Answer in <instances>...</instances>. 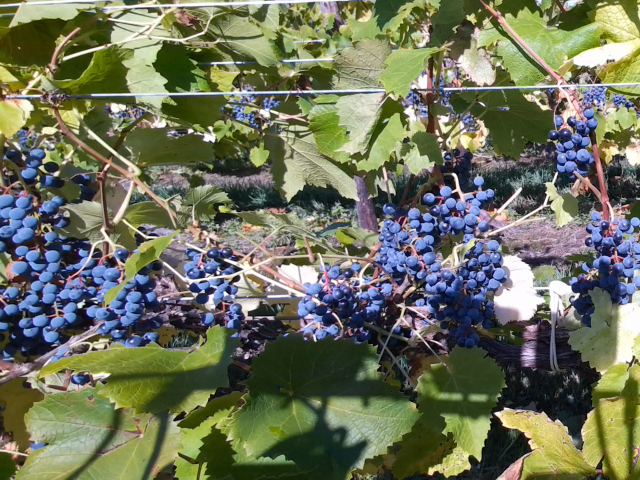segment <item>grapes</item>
<instances>
[{
  "label": "grapes",
  "instance_id": "01657485",
  "mask_svg": "<svg viewBox=\"0 0 640 480\" xmlns=\"http://www.w3.org/2000/svg\"><path fill=\"white\" fill-rule=\"evenodd\" d=\"M34 207V197L26 194L18 197L11 194L0 195V253L5 250L16 257H24L25 261H14L11 271L14 274H23L30 270L31 277L37 276L38 280L29 284V290L25 291L23 300L18 305L10 304L0 309V330L8 331L12 322L10 317L19 315V312H30L34 316H24L18 321L17 329L10 335V342L0 351V360L12 363L10 358L16 354L17 343L24 337L35 338L41 329L42 341L53 343L55 346L67 342L65 333H58L55 329L65 328L68 324L74 325L78 320V305L75 303L84 298L95 296L97 303H104V295L112 287L118 285L120 270L112 267L108 261L97 264L95 259L89 262L90 244L78 237L67 235L57 236L56 231L44 234V240L51 242L46 246L44 259H40L39 249L30 250L27 244L34 238V230L38 226V220L34 216H25ZM88 262L79 276L64 282L62 285L44 283L50 282L57 276L67 279ZM86 277H92V282L100 285V290L94 286H88ZM56 301L58 308H63L64 316L50 318L47 314H37L43 311L45 304L53 305Z\"/></svg>",
  "mask_w": 640,
  "mask_h": 480
},
{
  "label": "grapes",
  "instance_id": "b958b902",
  "mask_svg": "<svg viewBox=\"0 0 640 480\" xmlns=\"http://www.w3.org/2000/svg\"><path fill=\"white\" fill-rule=\"evenodd\" d=\"M440 194L447 198L445 203L438 205L436 195L433 192H426L423 195V201L429 206V211H425L422 215L418 207H410L407 210V217L410 220V227L413 229L409 234L406 230H401V225L392 219H386L381 227V232L377 235L382 245L377 247V253L380 256L375 258L377 265H381V269L387 274L405 273L417 276L419 280L424 278L426 282L424 290L428 294L425 300L417 299L415 305L417 307L427 306V310L431 314H436L439 310V303L444 301V292L449 297H457L464 284L468 289L475 290L478 286V293L465 295L460 302L462 307L480 308L482 303L487 299V293L496 290L507 280V275L502 267H495L503 263V255L498 252L499 242L490 240L487 243V249L494 251L489 255L483 252L485 243L477 240L472 247V258L460 268L458 272H452L450 269H441V263L437 261V254L432 244L435 237L431 234L438 225L440 216L442 221L439 223L438 235L445 237L447 233L450 235H459L462 231V241L468 243L473 237V226L477 224L480 232H485L489 227L487 220L478 223V215L480 213L481 202L495 197L493 189L478 190L475 195L467 194L465 200L470 203L469 213L467 204L464 201H457L452 195V187L444 185L440 188ZM427 232L422 238L414 241V247L418 251H423L422 260L428 265L429 269L422 268V264L416 256H407V254L398 250V244L407 246L420 233Z\"/></svg>",
  "mask_w": 640,
  "mask_h": 480
},
{
  "label": "grapes",
  "instance_id": "0513c4c2",
  "mask_svg": "<svg viewBox=\"0 0 640 480\" xmlns=\"http://www.w3.org/2000/svg\"><path fill=\"white\" fill-rule=\"evenodd\" d=\"M303 285L306 287V296L297 302L296 314L300 318L312 315V320L317 323H323L325 328H319L315 325L304 327L301 331L303 339L308 341L313 335L317 340H324L328 335H336L339 332V326L335 323L336 317L332 315L330 308L337 306L341 310L337 313L339 319H348L351 328L361 327L365 321L371 323L378 317L381 306L385 304L386 295H389L394 286L390 282L375 283V287H369L367 290L359 292V289L349 288L345 282L338 285L330 283V293L328 289H323L321 283L315 282L311 284L305 281ZM311 295L318 296V299L325 305L319 304L311 300ZM367 301L368 303L362 307L360 312L354 313L359 308V303Z\"/></svg>",
  "mask_w": 640,
  "mask_h": 480
},
{
  "label": "grapes",
  "instance_id": "84f90ec7",
  "mask_svg": "<svg viewBox=\"0 0 640 480\" xmlns=\"http://www.w3.org/2000/svg\"><path fill=\"white\" fill-rule=\"evenodd\" d=\"M157 288V284L150 280L145 274H137L128 279L124 288L117 296L112 298L108 307H99L97 304H90L83 309V314L89 319L102 321L97 328L100 335L110 334L115 341L122 343L125 347H145L147 343L157 341L159 334L155 331L145 333L143 337L133 334L128 339H121L127 335L129 325L135 324L143 315L145 302L147 308L155 309L159 306L157 294L152 291Z\"/></svg>",
  "mask_w": 640,
  "mask_h": 480
},
{
  "label": "grapes",
  "instance_id": "f8a65327",
  "mask_svg": "<svg viewBox=\"0 0 640 480\" xmlns=\"http://www.w3.org/2000/svg\"><path fill=\"white\" fill-rule=\"evenodd\" d=\"M589 218L592 222H599V225L589 223L585 227V231L590 235L585 239V245L588 248L596 246V249L600 252L597 258L592 261L593 267L602 269L610 265L612 263L610 258L613 256V252L609 248L614 246L617 247L618 253L624 258L622 263L613 265V273L617 277H632L634 271L640 270V262L634 261V258L640 260V243L636 241L634 236H631L629 240L623 241V232L633 235L636 227L640 226V219L636 216H633L631 220L622 219L615 232L608 237H604L602 233L609 229L610 223L603 220L601 213L596 210H592L589 213Z\"/></svg>",
  "mask_w": 640,
  "mask_h": 480
},
{
  "label": "grapes",
  "instance_id": "5460f4e3",
  "mask_svg": "<svg viewBox=\"0 0 640 480\" xmlns=\"http://www.w3.org/2000/svg\"><path fill=\"white\" fill-rule=\"evenodd\" d=\"M595 110L590 107L583 109V116L587 119L578 120L576 117H568L566 123L578 132L572 135V131L563 128L560 132L551 129L548 137L555 143L557 151L556 167L559 173H564L568 179H574L576 174L587 175L590 164L594 162L593 154L586 149L589 143V130L598 126V119L594 116Z\"/></svg>",
  "mask_w": 640,
  "mask_h": 480
},
{
  "label": "grapes",
  "instance_id": "83cd7487",
  "mask_svg": "<svg viewBox=\"0 0 640 480\" xmlns=\"http://www.w3.org/2000/svg\"><path fill=\"white\" fill-rule=\"evenodd\" d=\"M185 255L190 258L183 264V273L189 280L202 279L205 274L213 275L220 267L221 275H231L241 269L234 264H230L228 261H237L240 258L233 255V251L230 248H224L220 250L218 248H210L207 251V256L210 258L203 263L202 268L198 266V262L201 260L200 252L193 246H188L185 249Z\"/></svg>",
  "mask_w": 640,
  "mask_h": 480
},
{
  "label": "grapes",
  "instance_id": "e5b3c951",
  "mask_svg": "<svg viewBox=\"0 0 640 480\" xmlns=\"http://www.w3.org/2000/svg\"><path fill=\"white\" fill-rule=\"evenodd\" d=\"M240 280L239 275L235 276L231 281L226 278H208L207 280H200L198 283L192 282L189 289L192 293H198L195 296V301L199 305H205L209 301L207 294H212L217 301L223 299L225 291L228 295H236L239 292V287L235 284Z\"/></svg>",
  "mask_w": 640,
  "mask_h": 480
},
{
  "label": "grapes",
  "instance_id": "2adb6a1f",
  "mask_svg": "<svg viewBox=\"0 0 640 480\" xmlns=\"http://www.w3.org/2000/svg\"><path fill=\"white\" fill-rule=\"evenodd\" d=\"M46 152L41 147H35L26 156L25 166L20 171L23 179H34L38 175V167L44 162Z\"/></svg>",
  "mask_w": 640,
  "mask_h": 480
},
{
  "label": "grapes",
  "instance_id": "ef6de9ee",
  "mask_svg": "<svg viewBox=\"0 0 640 480\" xmlns=\"http://www.w3.org/2000/svg\"><path fill=\"white\" fill-rule=\"evenodd\" d=\"M638 288H640V275L634 276L632 281L627 284L618 282L612 292V297L621 305H627L630 302V295H633Z\"/></svg>",
  "mask_w": 640,
  "mask_h": 480
},
{
  "label": "grapes",
  "instance_id": "1ff8f66d",
  "mask_svg": "<svg viewBox=\"0 0 640 480\" xmlns=\"http://www.w3.org/2000/svg\"><path fill=\"white\" fill-rule=\"evenodd\" d=\"M243 306L239 302H231L228 309L223 314V321L226 324L228 330L238 329L241 326V322L245 320V315L242 313Z\"/></svg>",
  "mask_w": 640,
  "mask_h": 480
},
{
  "label": "grapes",
  "instance_id": "54f908b8",
  "mask_svg": "<svg viewBox=\"0 0 640 480\" xmlns=\"http://www.w3.org/2000/svg\"><path fill=\"white\" fill-rule=\"evenodd\" d=\"M325 264V271H327V276L330 279H341L346 280L347 278H351L355 275V271H360L362 269V265L359 262L351 263L349 268H345L343 273H340L341 267L338 264L331 266L329 263Z\"/></svg>",
  "mask_w": 640,
  "mask_h": 480
},
{
  "label": "grapes",
  "instance_id": "91a60905",
  "mask_svg": "<svg viewBox=\"0 0 640 480\" xmlns=\"http://www.w3.org/2000/svg\"><path fill=\"white\" fill-rule=\"evenodd\" d=\"M68 204V199L65 196L53 195L50 199L45 200L37 207V212L40 215L51 217L58 211L59 207H65Z\"/></svg>",
  "mask_w": 640,
  "mask_h": 480
},
{
  "label": "grapes",
  "instance_id": "dcf779d0",
  "mask_svg": "<svg viewBox=\"0 0 640 480\" xmlns=\"http://www.w3.org/2000/svg\"><path fill=\"white\" fill-rule=\"evenodd\" d=\"M582 270L584 272H581L577 277L572 276L569 280V284L571 286H574L575 284H577L579 281H583L586 277L587 274L585 272H590L592 270V265L589 262H583L581 264Z\"/></svg>",
  "mask_w": 640,
  "mask_h": 480
},
{
  "label": "grapes",
  "instance_id": "802abce8",
  "mask_svg": "<svg viewBox=\"0 0 640 480\" xmlns=\"http://www.w3.org/2000/svg\"><path fill=\"white\" fill-rule=\"evenodd\" d=\"M73 354V349L69 346H63L60 350L56 352L53 356L52 361L56 362L60 357H68L71 358Z\"/></svg>",
  "mask_w": 640,
  "mask_h": 480
}]
</instances>
